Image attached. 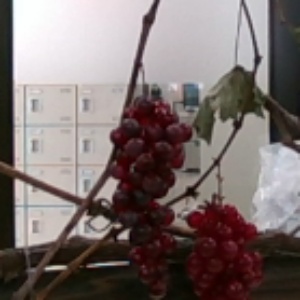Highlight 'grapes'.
<instances>
[{
    "label": "grapes",
    "mask_w": 300,
    "mask_h": 300,
    "mask_svg": "<svg viewBox=\"0 0 300 300\" xmlns=\"http://www.w3.org/2000/svg\"><path fill=\"white\" fill-rule=\"evenodd\" d=\"M192 137V127L180 123L167 100L146 95L137 96L125 108L120 126L110 132L115 155L110 173L120 179L112 193L111 213L123 226L131 227L128 241L134 248L128 260L139 267V281L149 287L151 300H164L174 288L165 258L177 251L175 237L162 233L160 227L171 224L175 212L155 199L165 198L176 184L173 170L183 166L184 143Z\"/></svg>",
    "instance_id": "obj_1"
},
{
    "label": "grapes",
    "mask_w": 300,
    "mask_h": 300,
    "mask_svg": "<svg viewBox=\"0 0 300 300\" xmlns=\"http://www.w3.org/2000/svg\"><path fill=\"white\" fill-rule=\"evenodd\" d=\"M187 225L199 236L185 258L188 278L202 300H247L263 282L264 256L244 251L257 228L233 204L192 210Z\"/></svg>",
    "instance_id": "obj_2"
}]
</instances>
